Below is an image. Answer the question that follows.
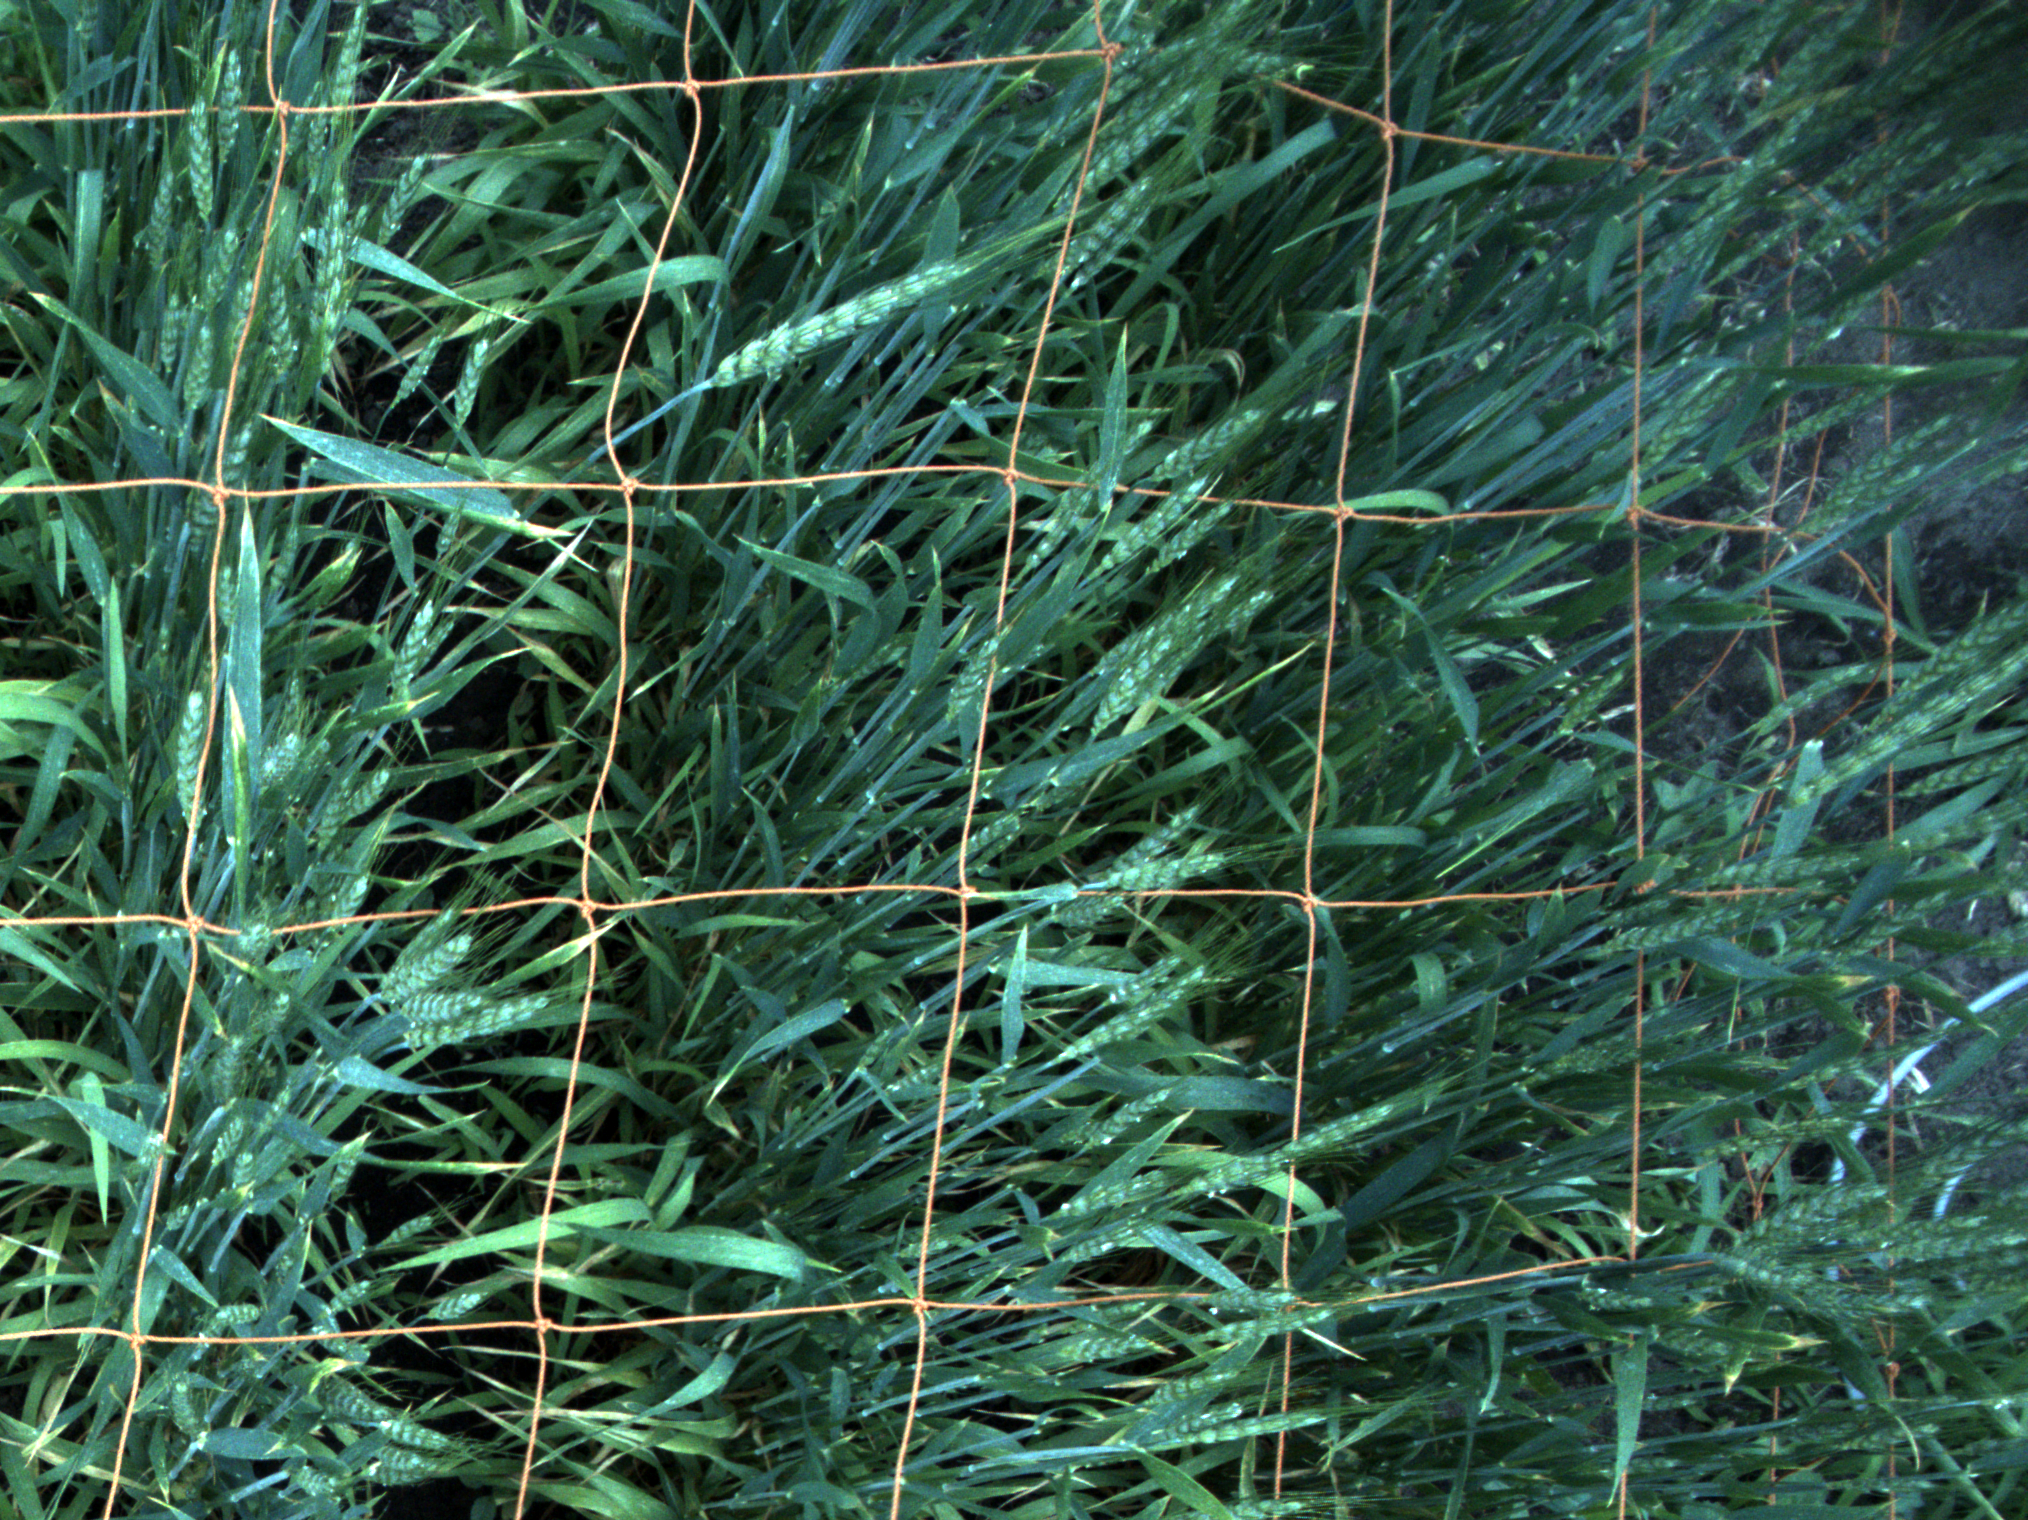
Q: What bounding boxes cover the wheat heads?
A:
[1601,899,1669,927]
[1184,1104,1389,1201]
[1104,957,1179,1005]
[1721,1246,1812,1291]
[1058,1120,1098,1142]
[178,215,198,293]
[216,50,243,156]
[1752,663,1868,732]
[1206,591,1273,640]
[224,281,261,359]
[1811,14,2023,147]
[171,1378,200,1436]
[158,623,175,675]
[1888,1214,2026,1259]
[713,261,969,390]
[405,994,548,1049]
[995,641,1044,685]
[1188,574,1240,626]
[165,1202,190,1232]
[383,934,472,1000]
[1935,148,2013,190]
[2009,886,2026,915]
[380,906,455,988]
[1722,219,1798,280]
[113,905,128,939]
[1184,1414,1326,1446]
[307,178,351,373]
[1059,894,1124,928]
[434,510,460,554]
[79,2,102,42]
[1157,1498,1305,1520]
[1784,654,2017,812]
[1862,1029,1945,1067]
[393,334,445,400]
[346,203,371,246]
[1811,412,1952,531]
[1062,1227,1135,1265]
[1675,1,1715,42]
[1905,1107,2024,1192]
[1635,75,1714,142]
[264,991,292,1036]
[1797,1290,1930,1323]
[901,1239,948,1261]
[428,1287,489,1321]
[1825,888,1952,974]
[398,991,481,1023]
[1640,194,1742,281]
[884,1064,941,1099]
[1082,1084,1171,1149]
[296,1462,336,1497]
[1559,668,1627,734]
[849,643,892,684]
[1037,772,1094,809]
[1894,1246,2001,1281]
[1550,1043,1643,1078]
[1960,1439,1999,1458]
[330,1148,362,1200]
[1656,1325,1729,1361]
[273,1250,294,1283]
[1803,138,1945,261]
[1065,35,1195,137]
[329,1280,368,1316]
[1767,381,1896,449]
[311,1321,346,1356]
[1109,29,1155,77]
[1689,107,1812,224]
[216,562,238,628]
[261,731,301,787]
[382,1419,447,1449]
[1905,743,2017,796]
[202,228,241,313]
[166,1045,191,1094]
[328,3,370,125]
[1596,904,1742,957]
[1844,1052,1880,1089]
[209,1114,244,1165]
[1055,999,1148,1060]
[1179,1286,1300,1312]
[1774,1419,1872,1441]
[1093,64,1183,151]
[1970,923,2028,958]
[221,1035,248,1098]
[299,739,331,775]
[1194,1303,1332,1343]
[377,152,432,245]
[376,1444,430,1472]
[211,1303,261,1329]
[1108,803,1198,872]
[1696,1255,1780,1287]
[1732,1187,1889,1245]
[292,899,319,946]
[234,1152,256,1187]
[1700,1114,1852,1160]
[1570,1459,1606,1475]
[1918,798,2014,851]
[1580,1286,1654,1314]
[1155,405,1264,484]
[192,422,254,551]
[326,872,370,934]
[1732,6,1786,67]
[965,818,1008,849]
[1889,59,2015,119]
[1807,287,1880,352]
[1820,122,1945,185]
[976,826,1020,871]
[227,364,248,414]
[1156,1403,1247,1443]
[343,769,390,820]
[1099,473,1209,573]
[304,98,328,177]
[1141,1369,1232,1405]
[1848,465,1921,517]
[1032,244,1073,280]
[1056,1171,1166,1223]
[177,687,209,834]
[226,1357,254,1380]
[375,1214,434,1251]
[138,1132,166,1168]
[270,526,300,589]
[235,920,275,960]
[184,325,218,404]
[277,677,301,739]
[1055,174,1154,280]
[1110,851,1224,890]
[320,1370,391,1418]
[1918,1393,1957,1406]
[161,292,181,368]
[1830,1425,1941,1453]
[417,618,455,669]
[1845,1211,1987,1241]
[1145,503,1232,575]
[1626,1454,1678,1476]
[1128,637,1202,714]
[1093,1298,1145,1319]
[210,1049,225,1096]
[267,268,295,380]
[1759,3,1863,116]
[1700,851,1861,889]
[1022,490,1093,569]
[282,78,320,162]
[861,1024,890,1067]
[1787,1063,1841,1093]
[1823,1477,1931,1493]
[1088,622,1155,674]
[363,1468,431,1487]
[1976,459,2023,488]
[146,166,177,272]
[1067,199,1155,293]
[1640,375,1737,473]
[254,1085,289,1139]
[1655,1014,1771,1061]
[394,597,436,687]
[1117,962,1203,1045]
[1077,91,1198,195]
[452,337,491,427]
[1217,38,1286,77]
[1203,0,1252,44]
[1896,601,2016,707]
[185,90,216,215]
[1057,1337,1153,1367]
[314,777,353,852]
[1642,1395,1700,1416]
[1054,418,1153,518]
[1090,639,1174,736]
[1966,1261,2026,1294]
[945,623,1009,720]
[1954,187,2028,218]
